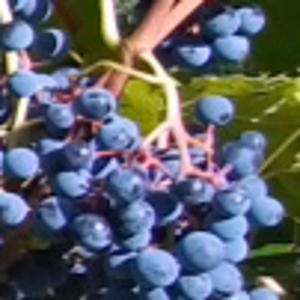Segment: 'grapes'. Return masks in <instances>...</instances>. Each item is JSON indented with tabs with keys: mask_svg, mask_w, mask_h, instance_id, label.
<instances>
[{
	"mask_svg": "<svg viewBox=\"0 0 300 300\" xmlns=\"http://www.w3.org/2000/svg\"><path fill=\"white\" fill-rule=\"evenodd\" d=\"M235 115V104L227 96L207 95L197 107V119L210 129H224Z\"/></svg>",
	"mask_w": 300,
	"mask_h": 300,
	"instance_id": "5",
	"label": "grapes"
},
{
	"mask_svg": "<svg viewBox=\"0 0 300 300\" xmlns=\"http://www.w3.org/2000/svg\"><path fill=\"white\" fill-rule=\"evenodd\" d=\"M99 84L75 67L8 77L14 98L41 95L44 126L55 135L32 150H0L1 178L51 180L55 196L33 209L42 234L104 254L106 271L135 283L139 300H279L276 289H247L239 269L251 229L273 232L286 219L285 203L258 176L268 154L264 131L222 144L216 174L209 142L151 144Z\"/></svg>",
	"mask_w": 300,
	"mask_h": 300,
	"instance_id": "1",
	"label": "grapes"
},
{
	"mask_svg": "<svg viewBox=\"0 0 300 300\" xmlns=\"http://www.w3.org/2000/svg\"><path fill=\"white\" fill-rule=\"evenodd\" d=\"M32 217L29 197L25 193L3 191L0 193V226L10 231L26 227Z\"/></svg>",
	"mask_w": 300,
	"mask_h": 300,
	"instance_id": "4",
	"label": "grapes"
},
{
	"mask_svg": "<svg viewBox=\"0 0 300 300\" xmlns=\"http://www.w3.org/2000/svg\"><path fill=\"white\" fill-rule=\"evenodd\" d=\"M12 112V102L9 96L0 94V124L7 122Z\"/></svg>",
	"mask_w": 300,
	"mask_h": 300,
	"instance_id": "6",
	"label": "grapes"
},
{
	"mask_svg": "<svg viewBox=\"0 0 300 300\" xmlns=\"http://www.w3.org/2000/svg\"><path fill=\"white\" fill-rule=\"evenodd\" d=\"M200 19L205 40L168 38L161 44L163 52L190 70H203L216 59L228 64L246 62L254 49L253 38L268 27V14L257 3L216 6L202 11Z\"/></svg>",
	"mask_w": 300,
	"mask_h": 300,
	"instance_id": "2",
	"label": "grapes"
},
{
	"mask_svg": "<svg viewBox=\"0 0 300 300\" xmlns=\"http://www.w3.org/2000/svg\"><path fill=\"white\" fill-rule=\"evenodd\" d=\"M53 0H16L12 4V21L0 29V44L10 51L32 50L36 56L57 62L70 51L72 39L67 31L48 29L36 32L54 16Z\"/></svg>",
	"mask_w": 300,
	"mask_h": 300,
	"instance_id": "3",
	"label": "grapes"
}]
</instances>
